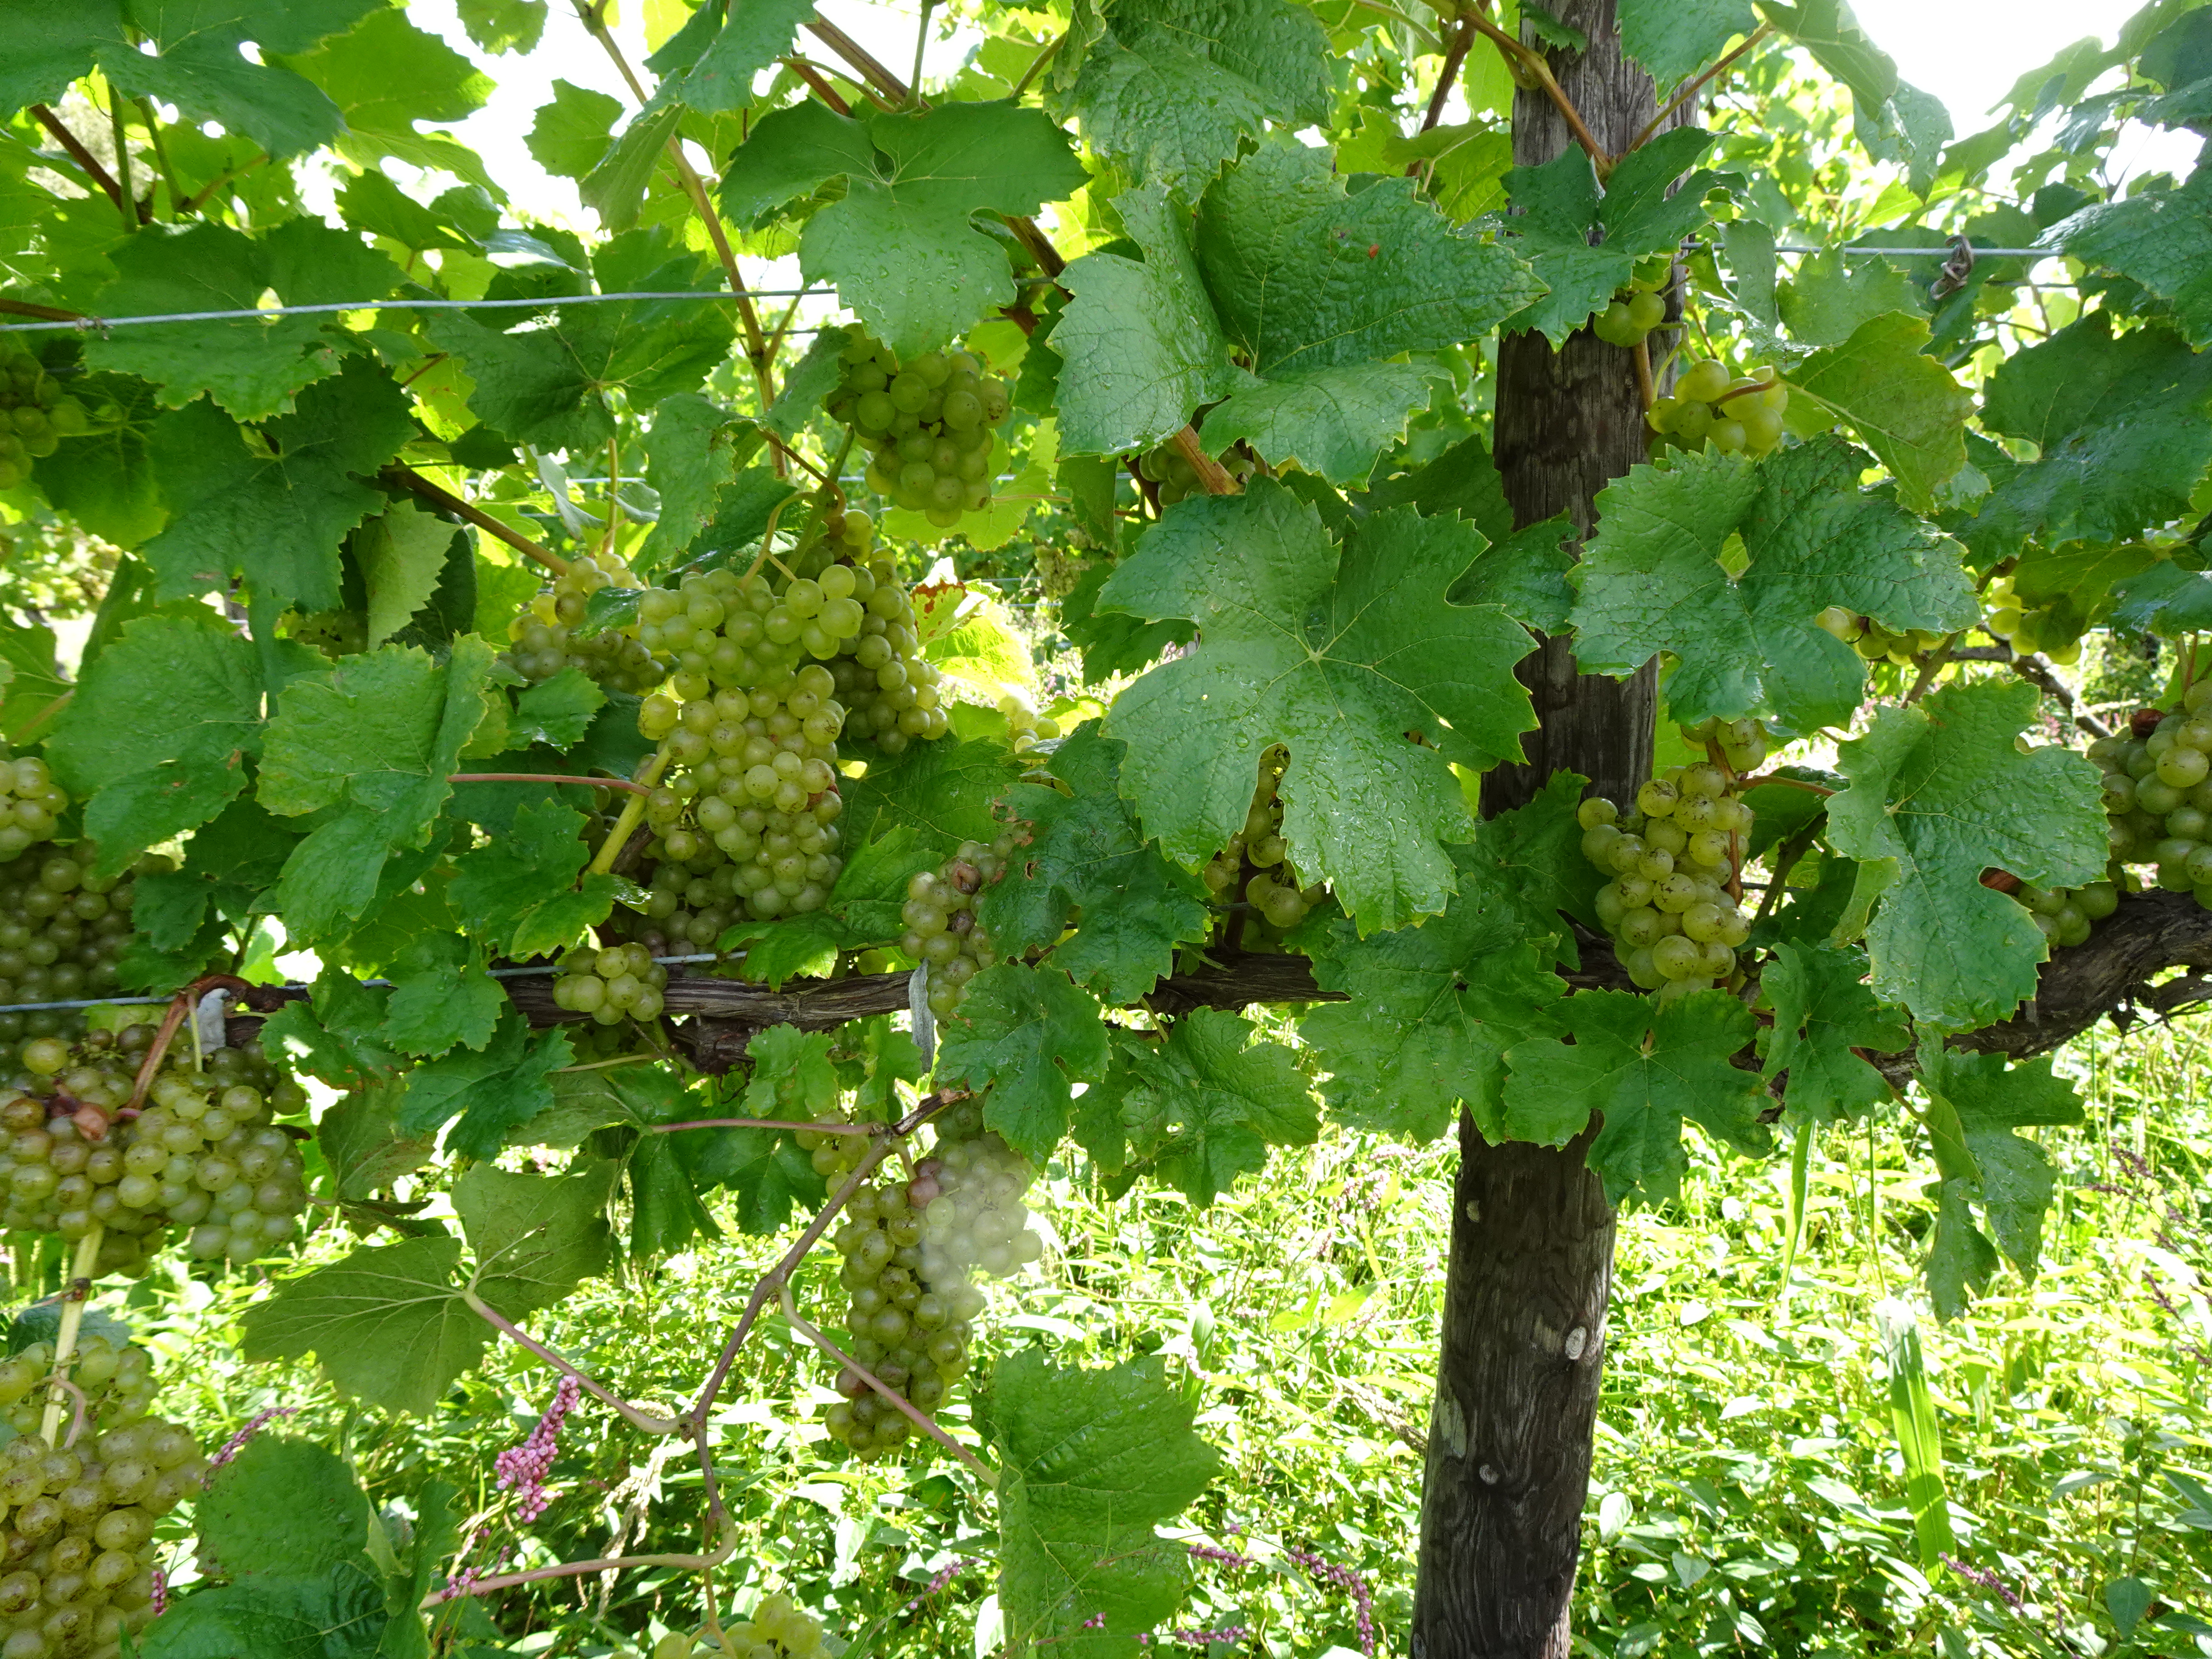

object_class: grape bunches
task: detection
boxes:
[0,1023,162,1279]
[632,788,755,966]
[1988,575,2083,665]
[1201,835,1245,891]
[1138,437,1257,508]
[637,665,846,925]
[1233,743,1324,942]
[1592,266,1672,348]
[825,323,1008,529]
[2135,678,2212,911]
[0,1340,161,1447]
[994,694,1061,754]
[506,552,644,643]
[1814,605,1948,665]
[0,352,87,488]
[610,1593,832,1659]
[1578,761,1755,996]
[553,942,668,1025]
[2087,701,2191,897]
[825,1180,987,1462]
[274,611,369,656]
[638,565,863,687]
[118,1036,306,1263]
[907,1087,1043,1278]
[497,592,667,693]
[1981,880,2117,950]
[856,948,890,979]
[1649,359,1790,466]
[565,771,630,854]
[793,512,948,757]
[0,840,175,1071]
[0,754,68,862]
[897,824,1032,1043]
[1680,716,1766,771]
[796,1109,883,1201]
[0,1416,215,1659]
